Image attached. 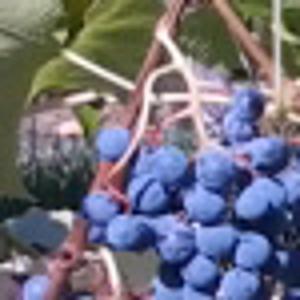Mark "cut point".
I'll use <instances>...</instances> for the list:
<instances>
[{
  "label": "cut point",
  "instance_id": "obj_1",
  "mask_svg": "<svg viewBox=\"0 0 300 300\" xmlns=\"http://www.w3.org/2000/svg\"><path fill=\"white\" fill-rule=\"evenodd\" d=\"M169 51L171 52L173 61L170 64L163 65L157 71L153 72L143 85V106L141 108L139 119L134 129L129 134V139L136 142L143 134L145 127L148 124L150 112L152 110V89L156 83L170 73L179 71L183 80L189 87L190 93V119L193 127L197 130L202 141L209 139V132L206 125L202 122L199 115V89L198 83L191 74L190 69L185 64L180 47L176 42L170 44Z\"/></svg>",
  "mask_w": 300,
  "mask_h": 300
}]
</instances>
